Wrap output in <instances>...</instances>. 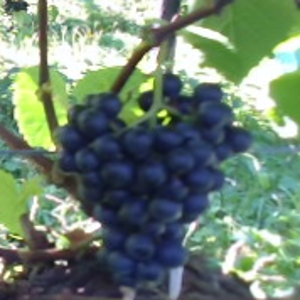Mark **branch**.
<instances>
[{"label":"branch","instance_id":"30e6481e","mask_svg":"<svg viewBox=\"0 0 300 300\" xmlns=\"http://www.w3.org/2000/svg\"><path fill=\"white\" fill-rule=\"evenodd\" d=\"M236 0H214L195 9L185 12L178 18V10L181 6L180 0H163L160 17V27L148 34L142 44L132 53L125 66L121 70L115 83L111 85L113 93L120 92L134 71L141 58L152 50V47H159L163 42L167 43V57L165 70L161 76H172L174 71V58L176 52V33L199 26L203 18L221 10Z\"/></svg>","mask_w":300,"mask_h":300},{"label":"branch","instance_id":"325d2c04","mask_svg":"<svg viewBox=\"0 0 300 300\" xmlns=\"http://www.w3.org/2000/svg\"><path fill=\"white\" fill-rule=\"evenodd\" d=\"M39 15V70L37 74V98L42 101L47 124L52 131L59 129V123L53 111L52 100L49 94L48 75V10L47 1H38Z\"/></svg>","mask_w":300,"mask_h":300}]
</instances>
